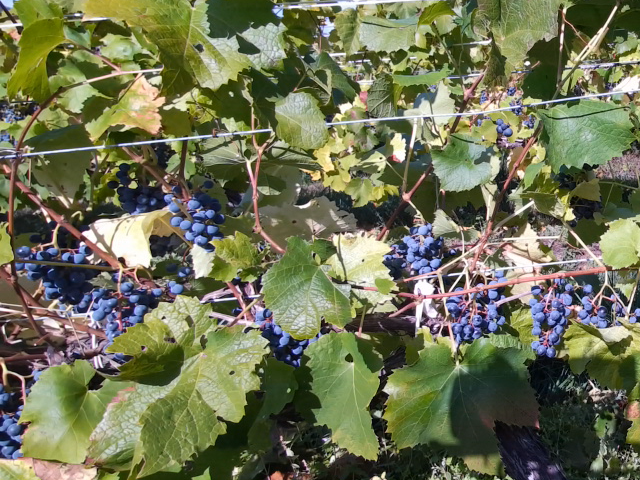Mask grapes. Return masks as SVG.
Segmentation results:
<instances>
[{"label": "grapes", "mask_w": 640, "mask_h": 480, "mask_svg": "<svg viewBox=\"0 0 640 480\" xmlns=\"http://www.w3.org/2000/svg\"><path fill=\"white\" fill-rule=\"evenodd\" d=\"M172 241L170 236L166 237H158L157 235H152L149 238L150 245V255L153 258L161 257L164 258L168 253H172L174 251V247L169 244Z\"/></svg>", "instance_id": "11"}, {"label": "grapes", "mask_w": 640, "mask_h": 480, "mask_svg": "<svg viewBox=\"0 0 640 480\" xmlns=\"http://www.w3.org/2000/svg\"><path fill=\"white\" fill-rule=\"evenodd\" d=\"M581 303L584 305V309L579 310L576 313V317L581 320L585 326H589L591 323L600 329H606L608 327L607 317L609 316L608 308L606 306H598L596 308V316H591L594 306L591 304L590 297L584 295L581 298Z\"/></svg>", "instance_id": "10"}, {"label": "grapes", "mask_w": 640, "mask_h": 480, "mask_svg": "<svg viewBox=\"0 0 640 480\" xmlns=\"http://www.w3.org/2000/svg\"><path fill=\"white\" fill-rule=\"evenodd\" d=\"M15 254L21 257L23 261H50L51 263H70L73 265H88L89 261L87 257L92 255V250L87 245H81L77 249V253L64 252L61 258L58 257V250L54 247H49L38 252L32 251L28 245H23L15 249Z\"/></svg>", "instance_id": "9"}, {"label": "grapes", "mask_w": 640, "mask_h": 480, "mask_svg": "<svg viewBox=\"0 0 640 480\" xmlns=\"http://www.w3.org/2000/svg\"><path fill=\"white\" fill-rule=\"evenodd\" d=\"M494 276L496 277L493 280H490L488 282V285L493 283V282H502V281H507V278L504 277L505 276V272L504 271H499V272H494Z\"/></svg>", "instance_id": "18"}, {"label": "grapes", "mask_w": 640, "mask_h": 480, "mask_svg": "<svg viewBox=\"0 0 640 480\" xmlns=\"http://www.w3.org/2000/svg\"><path fill=\"white\" fill-rule=\"evenodd\" d=\"M495 125L497 126L496 131L502 133L506 138H510L513 135V130L502 119H497Z\"/></svg>", "instance_id": "15"}, {"label": "grapes", "mask_w": 640, "mask_h": 480, "mask_svg": "<svg viewBox=\"0 0 640 480\" xmlns=\"http://www.w3.org/2000/svg\"><path fill=\"white\" fill-rule=\"evenodd\" d=\"M186 206V213L191 215L192 222L185 220L183 216H171L169 224L178 227L180 231H186L183 234L186 241H192L198 246H203L208 253H213L215 246L208 244V237L203 233L210 235L212 239L225 237L217 226L226 223V215L219 212L222 205L217 198H211L204 192H195L192 199L186 202Z\"/></svg>", "instance_id": "2"}, {"label": "grapes", "mask_w": 640, "mask_h": 480, "mask_svg": "<svg viewBox=\"0 0 640 480\" xmlns=\"http://www.w3.org/2000/svg\"><path fill=\"white\" fill-rule=\"evenodd\" d=\"M165 271L167 273L175 272V275L178 278H183L189 276L193 272V268L191 266H182L178 268V265L176 263H167L165 265Z\"/></svg>", "instance_id": "14"}, {"label": "grapes", "mask_w": 640, "mask_h": 480, "mask_svg": "<svg viewBox=\"0 0 640 480\" xmlns=\"http://www.w3.org/2000/svg\"><path fill=\"white\" fill-rule=\"evenodd\" d=\"M130 171V165L126 162H122L118 165V171L116 172V177L119 179V183L123 186H130L133 182L132 177L128 174ZM119 183L114 180H110L107 183V186L110 189H116L119 186Z\"/></svg>", "instance_id": "12"}, {"label": "grapes", "mask_w": 640, "mask_h": 480, "mask_svg": "<svg viewBox=\"0 0 640 480\" xmlns=\"http://www.w3.org/2000/svg\"><path fill=\"white\" fill-rule=\"evenodd\" d=\"M506 291V287H496L492 290H488L487 295L484 291L476 294V300H482L487 303V315L482 317L481 315H473L472 323L468 324V317L470 311L467 309L461 317L460 323L451 324V334L454 336V340L458 345H461L463 341H474L482 337V330H487L491 333H496L498 326H503L506 323V317L499 315L497 304L494 303L500 299H505L506 295L502 294Z\"/></svg>", "instance_id": "5"}, {"label": "grapes", "mask_w": 640, "mask_h": 480, "mask_svg": "<svg viewBox=\"0 0 640 480\" xmlns=\"http://www.w3.org/2000/svg\"><path fill=\"white\" fill-rule=\"evenodd\" d=\"M271 316L272 312L268 308L257 312L255 314V325L264 327L261 336L269 339L271 346L275 350L273 356L278 361H283L288 366L299 368L304 350L318 341L322 337V333L318 332L312 339L295 340L292 339L289 332L282 330L279 324L274 323L273 319L265 322L266 318Z\"/></svg>", "instance_id": "7"}, {"label": "grapes", "mask_w": 640, "mask_h": 480, "mask_svg": "<svg viewBox=\"0 0 640 480\" xmlns=\"http://www.w3.org/2000/svg\"><path fill=\"white\" fill-rule=\"evenodd\" d=\"M171 191L173 193L163 195L159 187L138 185L136 189L119 187L117 194L118 201L123 203L122 209L130 215L162 210L168 205L172 214H178L182 209V200L176 199V195L182 194V187L179 184H173Z\"/></svg>", "instance_id": "6"}, {"label": "grapes", "mask_w": 640, "mask_h": 480, "mask_svg": "<svg viewBox=\"0 0 640 480\" xmlns=\"http://www.w3.org/2000/svg\"><path fill=\"white\" fill-rule=\"evenodd\" d=\"M433 225L427 223L426 225L412 226L410 233L412 235L420 234L425 236V242L420 244L418 238H414L410 235H405L402 239V243L393 244L391 249L396 251V254H385L383 260L385 262L399 263L401 269H405L409 263H412V269L417 271L419 275L428 274L432 271H437L442 264V259L436 257L438 255V249L443 246L445 238L440 236L434 241L432 235Z\"/></svg>", "instance_id": "4"}, {"label": "grapes", "mask_w": 640, "mask_h": 480, "mask_svg": "<svg viewBox=\"0 0 640 480\" xmlns=\"http://www.w3.org/2000/svg\"><path fill=\"white\" fill-rule=\"evenodd\" d=\"M15 393L13 391L6 392L3 388V384L0 383V405L4 403V401H8L9 397H14Z\"/></svg>", "instance_id": "17"}, {"label": "grapes", "mask_w": 640, "mask_h": 480, "mask_svg": "<svg viewBox=\"0 0 640 480\" xmlns=\"http://www.w3.org/2000/svg\"><path fill=\"white\" fill-rule=\"evenodd\" d=\"M16 271L26 270V279L30 282H37L39 278H43V286L45 287L44 299L52 301L58 299L57 306L59 309L65 310L63 305L68 301L74 305L76 313H85L89 310L93 311L92 319L94 321H102L107 317L105 332L107 336V344L103 347L106 355L114 354L113 360L119 364H125L133 359L131 354L122 352L106 353L105 349L112 345L115 338L122 335L127 328H133L135 324L144 321L143 316L149 312V309H155L159 306L160 297L164 294L161 288H153L151 294L148 295L146 288H134L132 281H126L127 277L120 278V292L128 298L130 309L120 311H112L111 307L118 304L117 296L107 297V289H94V284L85 282L89 281L101 274L100 269L90 267H70V266H49L36 263H15Z\"/></svg>", "instance_id": "1"}, {"label": "grapes", "mask_w": 640, "mask_h": 480, "mask_svg": "<svg viewBox=\"0 0 640 480\" xmlns=\"http://www.w3.org/2000/svg\"><path fill=\"white\" fill-rule=\"evenodd\" d=\"M42 374L41 370L38 369H33L31 372V375L33 376V379L27 383V386L25 387V393L26 394H30L31 393V388L33 385H35L37 383V380L39 378V376Z\"/></svg>", "instance_id": "16"}, {"label": "grapes", "mask_w": 640, "mask_h": 480, "mask_svg": "<svg viewBox=\"0 0 640 480\" xmlns=\"http://www.w3.org/2000/svg\"><path fill=\"white\" fill-rule=\"evenodd\" d=\"M464 299V295H458L455 297H449L446 299L445 307L451 312V317L455 320L461 315L460 313L465 308L464 303H460Z\"/></svg>", "instance_id": "13"}, {"label": "grapes", "mask_w": 640, "mask_h": 480, "mask_svg": "<svg viewBox=\"0 0 640 480\" xmlns=\"http://www.w3.org/2000/svg\"><path fill=\"white\" fill-rule=\"evenodd\" d=\"M23 405H19L13 415L0 416V453L7 459L22 458L19 450L23 446V426L16 422L21 418Z\"/></svg>", "instance_id": "8"}, {"label": "grapes", "mask_w": 640, "mask_h": 480, "mask_svg": "<svg viewBox=\"0 0 640 480\" xmlns=\"http://www.w3.org/2000/svg\"><path fill=\"white\" fill-rule=\"evenodd\" d=\"M554 282L563 286L565 292L557 293L555 298L551 300V307L557 309L550 313H543L545 304L538 299H531L529 306L531 307V317L534 319L532 334L535 337H539V341H533L531 343V349L536 351L539 356H547L550 359H554L557 356V347L562 340L560 335L565 333V326L568 324L566 319L571 315V309L569 308L573 304V295L570 293L574 290L572 284L567 283L563 277H556ZM547 319V324L552 327V332L547 337L543 334L542 323Z\"/></svg>", "instance_id": "3"}]
</instances>
